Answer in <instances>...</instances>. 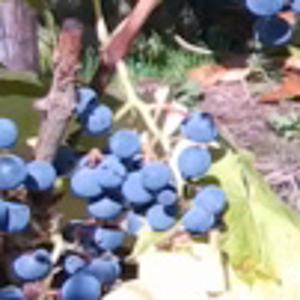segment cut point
<instances>
[{"instance_id": "6a23745f", "label": "cut point", "mask_w": 300, "mask_h": 300, "mask_svg": "<svg viewBox=\"0 0 300 300\" xmlns=\"http://www.w3.org/2000/svg\"><path fill=\"white\" fill-rule=\"evenodd\" d=\"M117 68L121 76V81L125 95L127 97V99L124 100L120 105V108L118 109V114L120 116H125L129 113V110L131 108H134L146 123L151 134L153 136L160 135L161 129L150 112L169 111L171 109V106L166 103H142V101L138 98L137 94L135 93L130 77V72L123 57L117 63Z\"/></svg>"}]
</instances>
